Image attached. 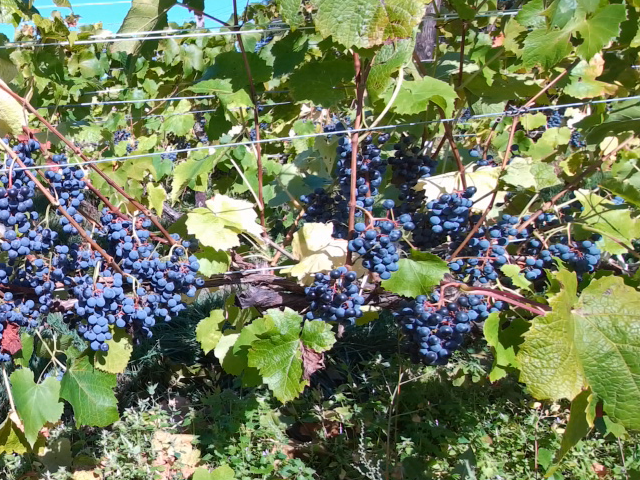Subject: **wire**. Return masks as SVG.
<instances>
[{"label": "wire", "instance_id": "wire-1", "mask_svg": "<svg viewBox=\"0 0 640 480\" xmlns=\"http://www.w3.org/2000/svg\"><path fill=\"white\" fill-rule=\"evenodd\" d=\"M632 100H640V94L629 95L624 97H613L608 99L574 101V102H568L565 104H559L554 106L523 108V109L494 112V113H482L478 116H471V117L439 119V120H430V121H409L403 124H380V125H375L371 127H362V128H340V129H332V130H323L320 132L309 133V134H296V135H284L279 137H269V138H263V139L253 140V141H243L240 143L197 145V146H190V147H185L181 149H163L160 151H150V152H144V153H137L133 155H125V156H107L102 159H85V160H76L71 162H56V163L42 164V165H28L24 167H14L13 171L26 172L30 170H45V169H53V168H59V167H74V166L87 165V164H102L110 161H127V160H135L139 158H146V157H152V156H162L165 154H183V153L199 151V150L242 148L245 146H255V145L266 144L271 142H281V141L298 140V139H311V138H318L326 135H335V134H342V133H364V132H373V131L383 130V129H405L412 126H432V125H442V124H452V123L473 122V121H480L488 118L512 116V115L525 114V113L556 111V110L567 109V108L576 107V106L610 104L615 102H626V101H632Z\"/></svg>", "mask_w": 640, "mask_h": 480}, {"label": "wire", "instance_id": "wire-2", "mask_svg": "<svg viewBox=\"0 0 640 480\" xmlns=\"http://www.w3.org/2000/svg\"><path fill=\"white\" fill-rule=\"evenodd\" d=\"M287 20L281 21H267V26H283L287 25ZM245 26H252L261 28L262 24L254 21H242L237 25H221V26H188L179 30H137L133 32H121V33H104L98 35H92L89 37L90 41H74V46H92L97 43H121V42H155L163 39H176V38H199L209 37L215 35H255V34H273L289 31V26H283L280 28L270 29H253V30H241Z\"/></svg>", "mask_w": 640, "mask_h": 480}, {"label": "wire", "instance_id": "wire-3", "mask_svg": "<svg viewBox=\"0 0 640 480\" xmlns=\"http://www.w3.org/2000/svg\"><path fill=\"white\" fill-rule=\"evenodd\" d=\"M521 12H522L521 8H498L494 10L479 9L478 10L479 14H475L474 18L482 19V18H497V17H503V16H517L518 13H521Z\"/></svg>", "mask_w": 640, "mask_h": 480}, {"label": "wire", "instance_id": "wire-4", "mask_svg": "<svg viewBox=\"0 0 640 480\" xmlns=\"http://www.w3.org/2000/svg\"><path fill=\"white\" fill-rule=\"evenodd\" d=\"M69 42H61V43H38V42H23L20 44L13 45H0V50H15L22 49L25 47H36V48H63L68 47Z\"/></svg>", "mask_w": 640, "mask_h": 480}, {"label": "wire", "instance_id": "wire-5", "mask_svg": "<svg viewBox=\"0 0 640 480\" xmlns=\"http://www.w3.org/2000/svg\"><path fill=\"white\" fill-rule=\"evenodd\" d=\"M294 267H295L294 263H286V264H280V265H264V266L248 268V269L228 270L227 274L228 275L250 274V273H257V272L266 271V270H282V269H289Z\"/></svg>", "mask_w": 640, "mask_h": 480}, {"label": "wire", "instance_id": "wire-6", "mask_svg": "<svg viewBox=\"0 0 640 480\" xmlns=\"http://www.w3.org/2000/svg\"><path fill=\"white\" fill-rule=\"evenodd\" d=\"M426 17H435V18H425L422 20L423 24L427 23H437L442 21H451L458 20L459 16L456 11H436V12H426Z\"/></svg>", "mask_w": 640, "mask_h": 480}]
</instances>
